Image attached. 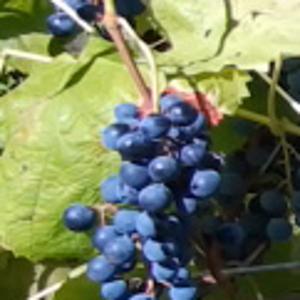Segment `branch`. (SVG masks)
Here are the masks:
<instances>
[{
	"instance_id": "obj_1",
	"label": "branch",
	"mask_w": 300,
	"mask_h": 300,
	"mask_svg": "<svg viewBox=\"0 0 300 300\" xmlns=\"http://www.w3.org/2000/svg\"><path fill=\"white\" fill-rule=\"evenodd\" d=\"M114 8L115 0H104L103 17L106 22L107 30L110 32L111 37L117 46L121 60L126 66L127 72L130 74L135 86L137 87L138 95L143 104V109L146 112H151L153 110L152 94L150 93L149 86L143 72L138 67L136 60L132 56V52L125 35L123 34L120 26L114 22V19L116 18Z\"/></svg>"
}]
</instances>
